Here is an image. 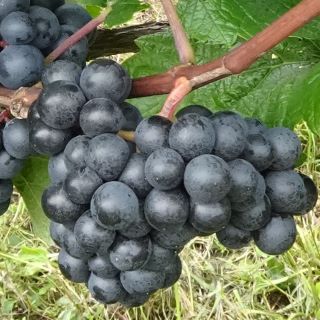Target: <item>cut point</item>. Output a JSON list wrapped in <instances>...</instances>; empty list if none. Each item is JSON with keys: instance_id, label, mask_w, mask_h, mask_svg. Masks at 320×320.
Here are the masks:
<instances>
[{"instance_id": "1", "label": "cut point", "mask_w": 320, "mask_h": 320, "mask_svg": "<svg viewBox=\"0 0 320 320\" xmlns=\"http://www.w3.org/2000/svg\"><path fill=\"white\" fill-rule=\"evenodd\" d=\"M192 91V85L190 81H184L180 85L176 86L169 94L161 113L155 116H163L169 119L172 123L176 122L177 119L174 117V112L177 105L181 101L182 97Z\"/></svg>"}]
</instances>
